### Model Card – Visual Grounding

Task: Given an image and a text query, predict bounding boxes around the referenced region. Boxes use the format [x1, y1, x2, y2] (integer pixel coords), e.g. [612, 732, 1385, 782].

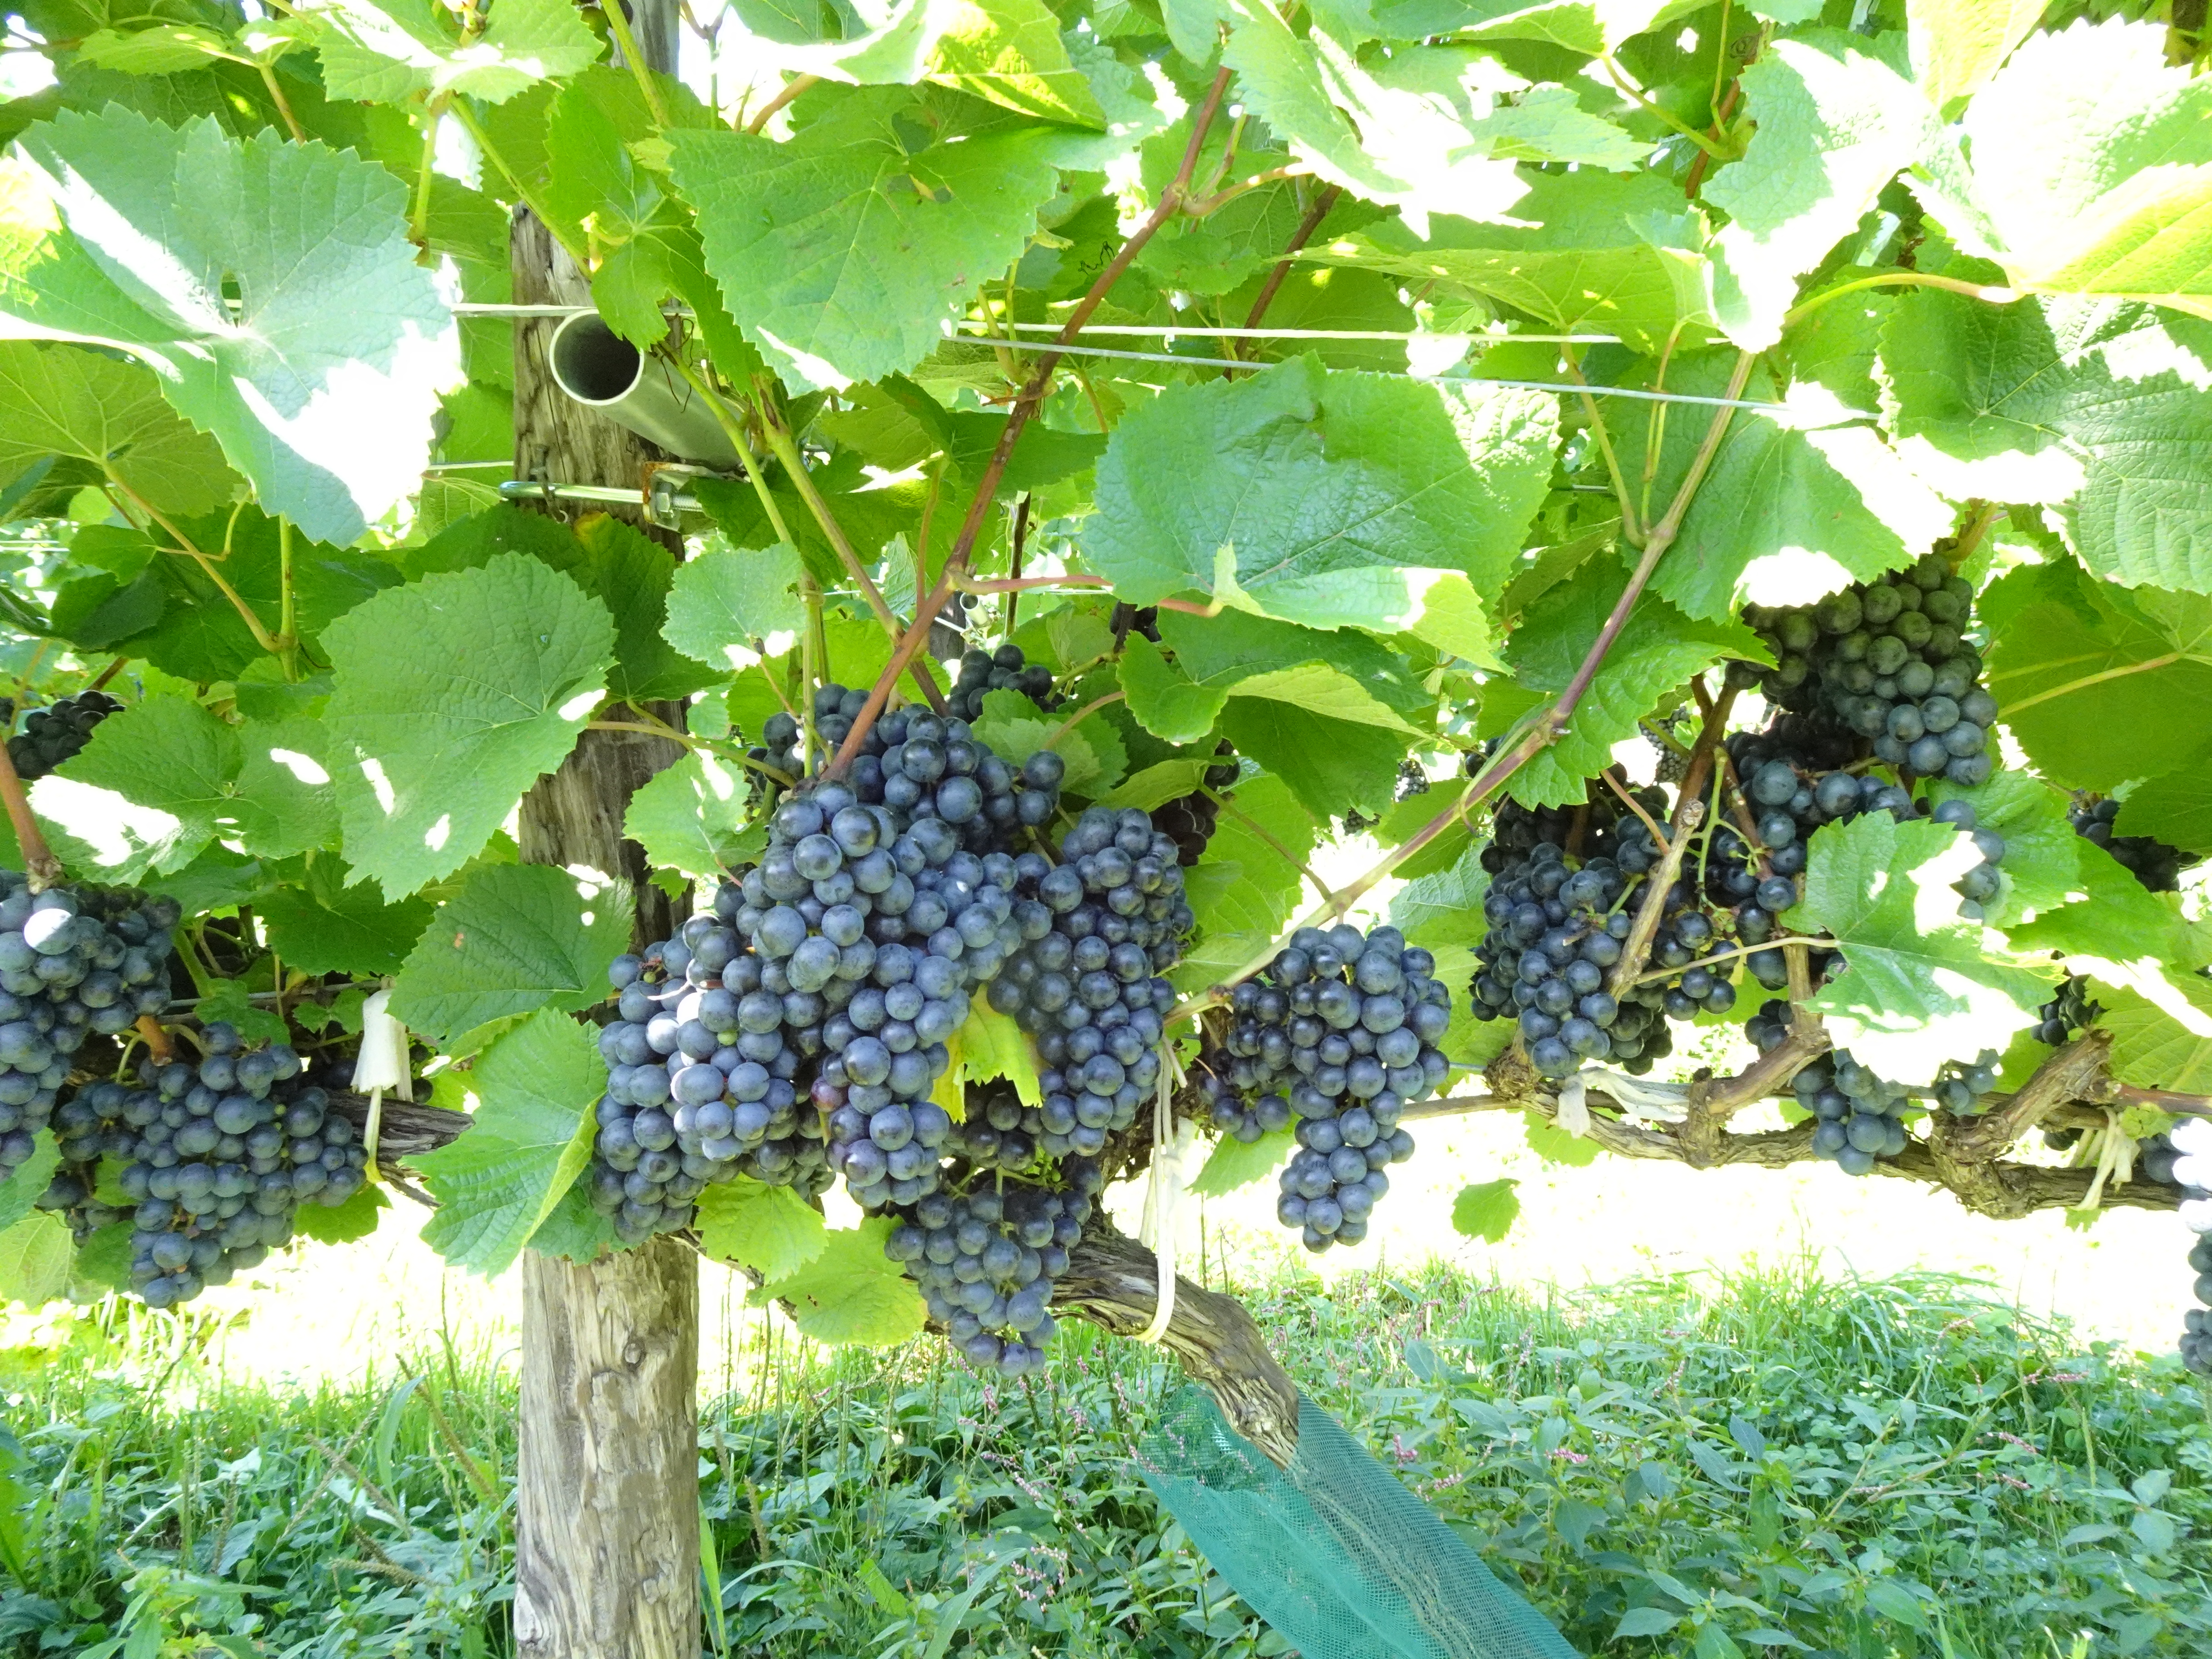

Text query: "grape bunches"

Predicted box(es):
[1605, 1002, 1674, 1076]
[1729, 728, 2003, 929]
[2139, 1117, 2212, 1201]
[2178, 1229, 2212, 1378]
[1485, 843, 1659, 1076]
[1727, 690, 1874, 785]
[1186, 1045, 1289, 1143]
[945, 645, 1059, 723]
[884, 1089, 1105, 1379]
[1719, 537, 1997, 787]
[591, 943, 699, 1248]
[1042, 805, 1204, 976]
[168, 915, 262, 1009]
[38, 1023, 369, 1308]
[0, 876, 179, 1182]
[649, 915, 822, 1183]
[716, 784, 1057, 1211]
[6, 689, 124, 778]
[1617, 802, 1801, 1020]
[1467, 738, 1667, 1022]
[988, 899, 1177, 1158]
[1150, 741, 1239, 869]
[743, 684, 1067, 858]
[270, 971, 432, 1106]
[1109, 600, 1165, 655]
[2064, 789, 2203, 894]
[1805, 932, 1852, 984]
[2034, 974, 2106, 1149]
[1744, 996, 1997, 1176]
[1232, 924, 1453, 1252]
